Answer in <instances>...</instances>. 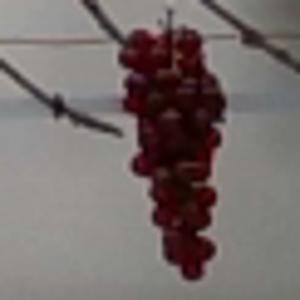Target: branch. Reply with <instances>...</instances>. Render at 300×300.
Here are the masks:
<instances>
[{
    "label": "branch",
    "instance_id": "1",
    "mask_svg": "<svg viewBox=\"0 0 300 300\" xmlns=\"http://www.w3.org/2000/svg\"><path fill=\"white\" fill-rule=\"evenodd\" d=\"M0 71L8 76L18 88L31 95L42 107L50 110L54 123L66 117L74 130L83 127L90 132L111 137L115 140L125 138L124 131L113 123L90 116L81 110L79 106L71 107L68 105L62 91H54L52 96L45 92L43 88L31 82L26 75L1 55Z\"/></svg>",
    "mask_w": 300,
    "mask_h": 300
},
{
    "label": "branch",
    "instance_id": "2",
    "mask_svg": "<svg viewBox=\"0 0 300 300\" xmlns=\"http://www.w3.org/2000/svg\"><path fill=\"white\" fill-rule=\"evenodd\" d=\"M196 1L205 10L212 12L224 24L230 26L232 30L239 32V44L242 48L252 52H261L266 57L293 72L294 75L300 76V58L290 50L269 38L266 33L250 26L249 23L232 13L230 9L225 8L217 0Z\"/></svg>",
    "mask_w": 300,
    "mask_h": 300
},
{
    "label": "branch",
    "instance_id": "3",
    "mask_svg": "<svg viewBox=\"0 0 300 300\" xmlns=\"http://www.w3.org/2000/svg\"><path fill=\"white\" fill-rule=\"evenodd\" d=\"M78 5L91 18L98 31H101L105 37L110 38L116 46L127 40L128 35L117 26V24L108 15L100 0H75Z\"/></svg>",
    "mask_w": 300,
    "mask_h": 300
}]
</instances>
